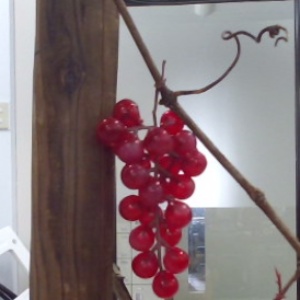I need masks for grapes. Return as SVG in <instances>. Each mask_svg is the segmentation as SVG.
<instances>
[{"instance_id": "grapes-1", "label": "grapes", "mask_w": 300, "mask_h": 300, "mask_svg": "<svg viewBox=\"0 0 300 300\" xmlns=\"http://www.w3.org/2000/svg\"><path fill=\"white\" fill-rule=\"evenodd\" d=\"M96 124V137L125 163L120 170L122 185L138 194L127 195L118 212L128 221L139 220L128 236L131 247L140 251L133 258L134 273L154 278L153 290L160 298L179 291V278L189 267V254L177 247L182 229L193 212L180 199L196 190L191 177L200 176L207 158L196 147L197 136L185 128L183 118L171 110L160 115V128L144 123L136 101L122 97Z\"/></svg>"}]
</instances>
